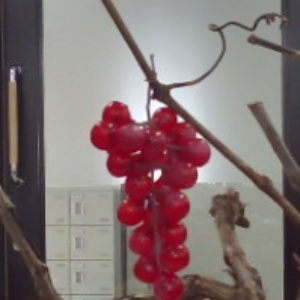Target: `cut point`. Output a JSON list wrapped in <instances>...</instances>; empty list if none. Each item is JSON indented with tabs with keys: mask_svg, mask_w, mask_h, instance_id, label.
I'll use <instances>...</instances> for the list:
<instances>
[{
	"mask_svg": "<svg viewBox=\"0 0 300 300\" xmlns=\"http://www.w3.org/2000/svg\"><path fill=\"white\" fill-rule=\"evenodd\" d=\"M147 87H148V100H147V104H146V110L148 113V119H151V90H152V86L150 83H147Z\"/></svg>",
	"mask_w": 300,
	"mask_h": 300,
	"instance_id": "1",
	"label": "cut point"
}]
</instances>
